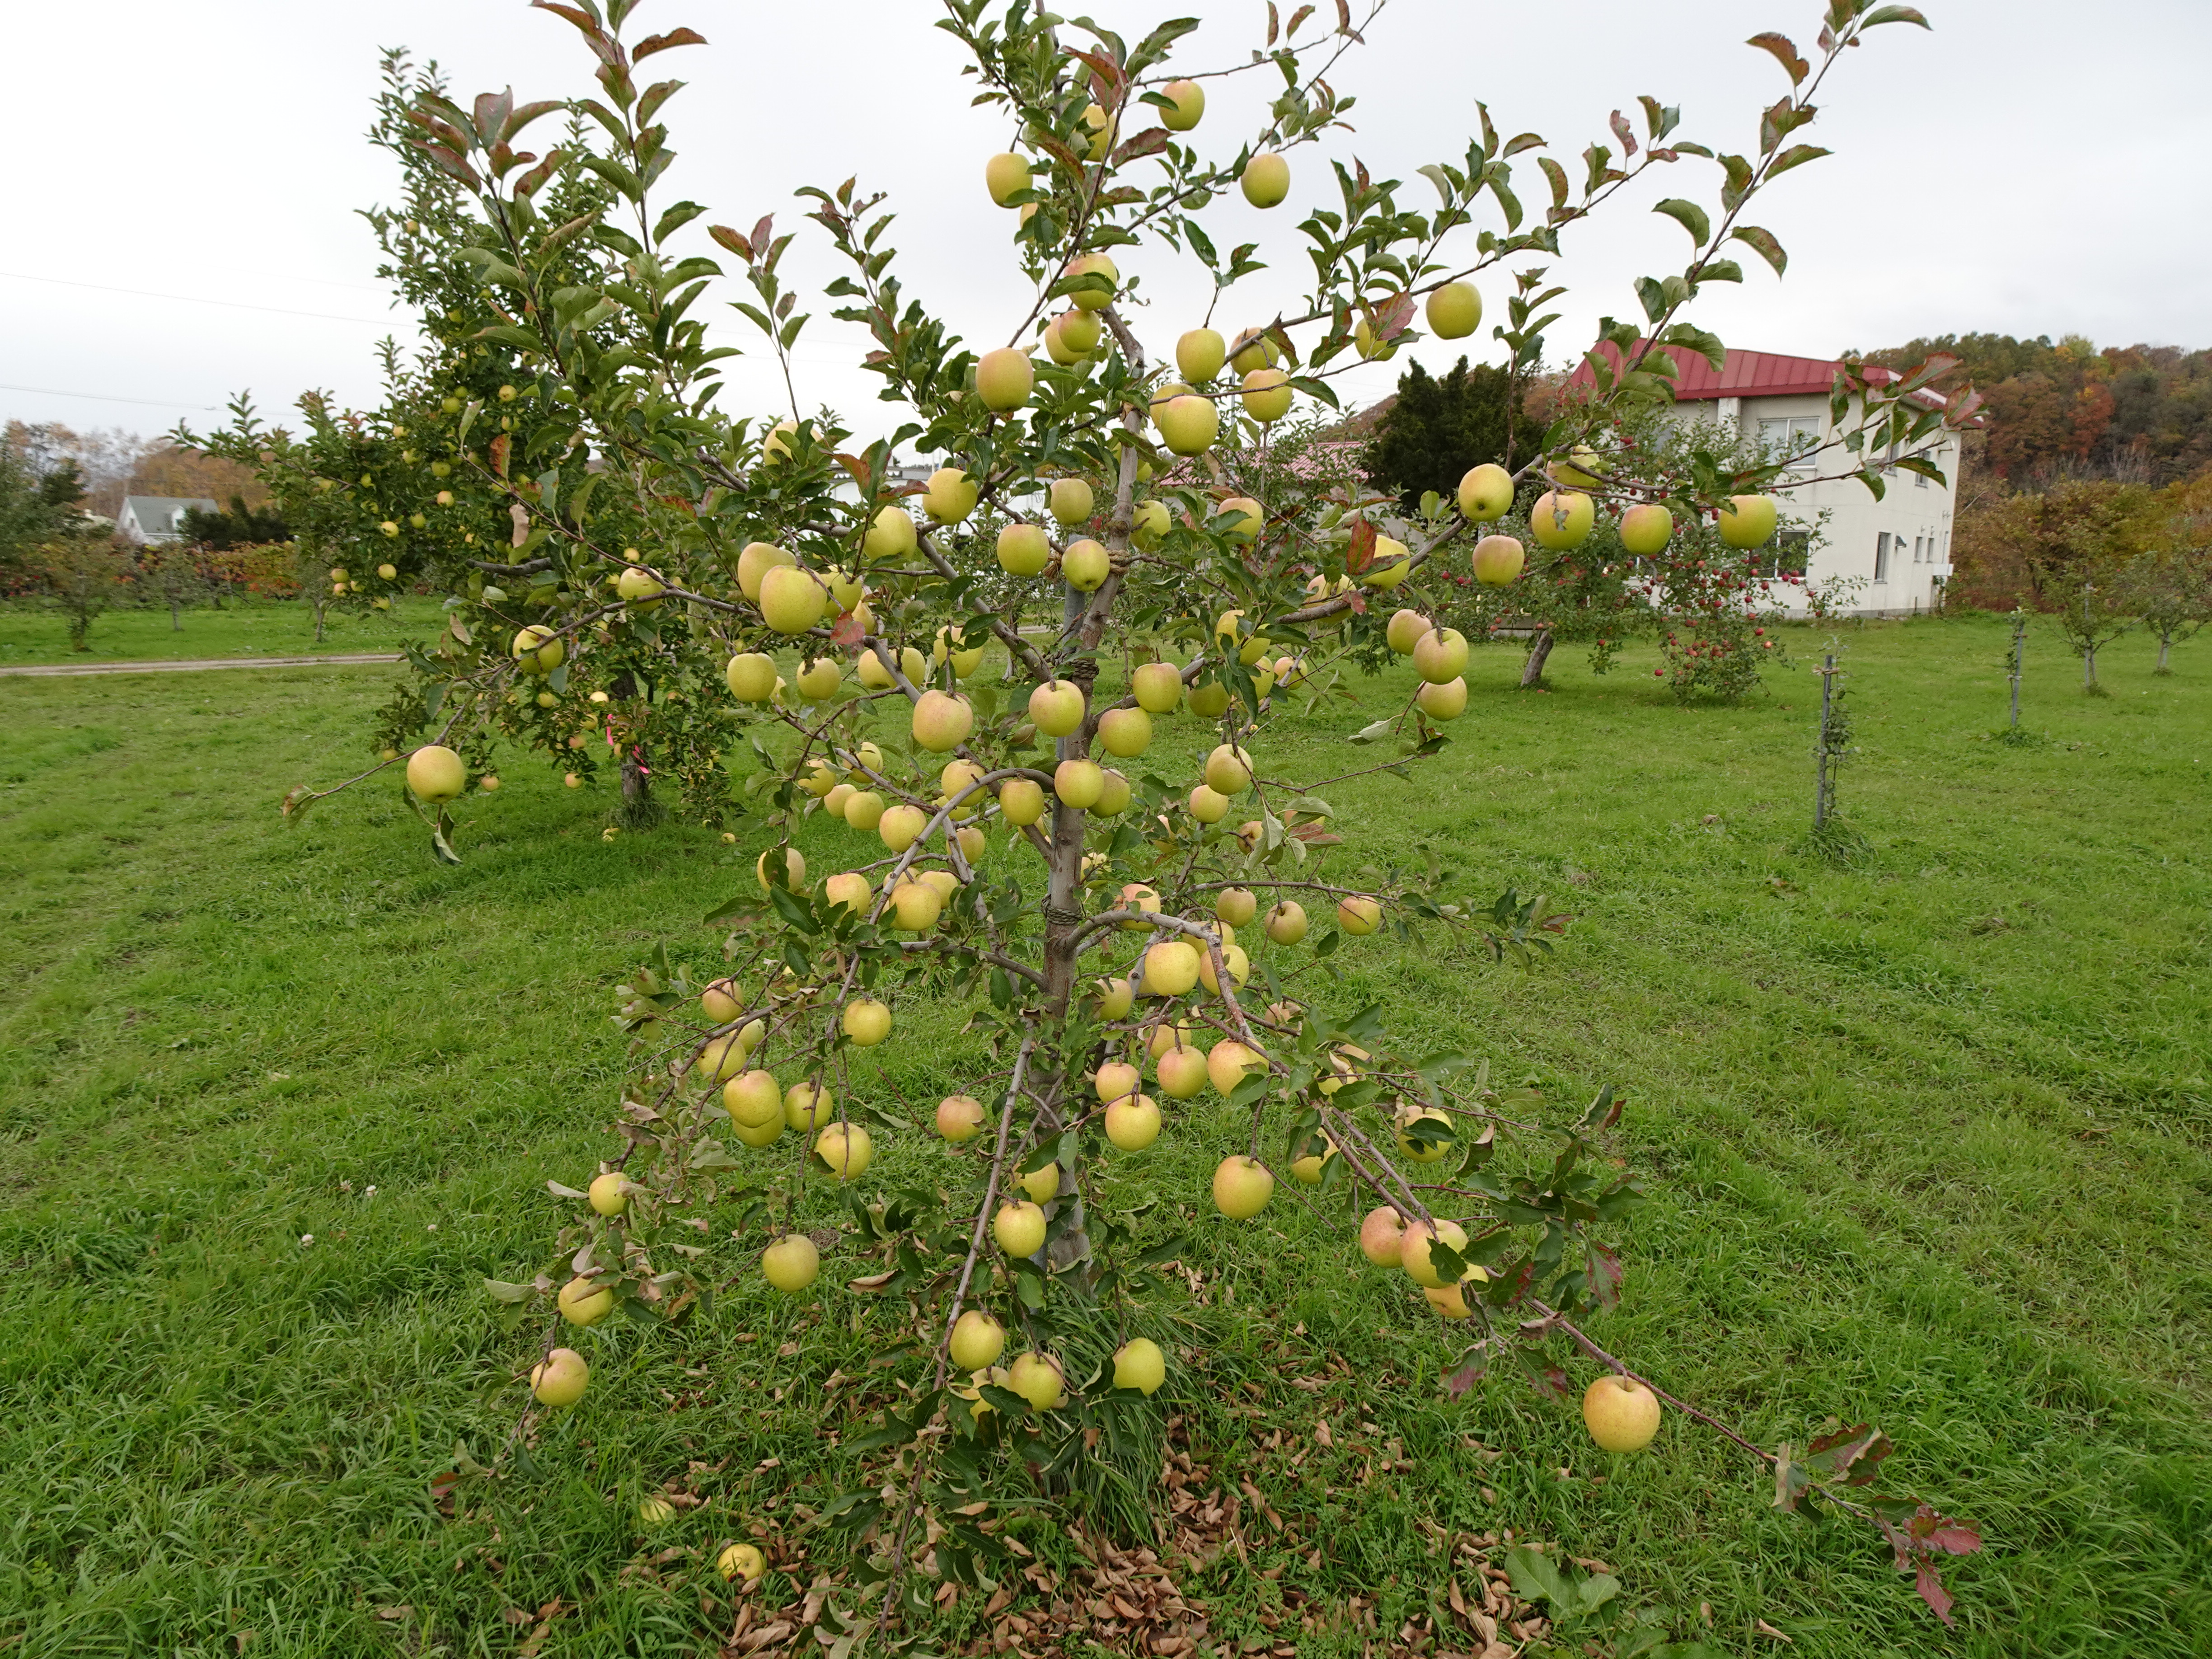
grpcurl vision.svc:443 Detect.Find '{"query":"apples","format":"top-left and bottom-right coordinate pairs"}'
top-left (1387, 609), bottom-right (1433, 656)
top-left (859, 588), bottom-right (870, 606)
top-left (883, 867), bottom-right (922, 891)
top-left (824, 784), bottom-right (858, 818)
top-left (1620, 504), bottom-right (1673, 555)
top-left (859, 505), bottom-right (917, 562)
top-left (912, 689), bottom-right (973, 753)
top-left (1158, 79), bottom-right (1204, 131)
top-left (1207, 1036), bottom-right (1269, 1099)
top-left (820, 564), bottom-right (862, 619)
top-left (1217, 497), bottom-right (1263, 537)
top-left (757, 848), bottom-right (805, 895)
top-left (1058, 309), bottom-right (1102, 352)
top-left (1157, 1045), bottom-right (1208, 1099)
top-left (1112, 1337), bottom-right (1165, 1397)
top-left (1151, 814), bottom-right (1191, 855)
top-left (1237, 821), bottom-right (1264, 855)
top-left (1029, 680), bottom-right (1085, 737)
top-left (1423, 1258), bottom-right (1489, 1318)
top-left (1086, 769), bottom-right (1131, 818)
top-left (1531, 488), bottom-right (1595, 550)
top-left (1020, 198), bottom-right (1071, 248)
top-left (1413, 627), bottom-right (1469, 685)
top-left (1304, 573), bottom-right (1357, 623)
top-left (1214, 609), bottom-right (1271, 667)
top-left (1290, 1127), bottom-right (1339, 1184)
top-left (407, 746), bottom-right (466, 805)
top-left (946, 828), bottom-right (985, 864)
top-left (1241, 369), bottom-right (1293, 422)
top-left (1161, 395), bottom-right (1219, 457)
top-left (1359, 534), bottom-right (1411, 590)
top-left (814, 1122), bottom-right (871, 1181)
top-left (1045, 314), bottom-right (1091, 366)
top-left (1273, 656), bottom-right (1308, 690)
top-left (762, 1234), bottom-right (819, 1292)
top-left (1071, 104), bottom-right (1121, 162)
top-left (1229, 327), bottom-right (1280, 377)
top-left (1216, 887), bottom-right (1257, 928)
top-left (1132, 662), bottom-right (1182, 713)
top-left (558, 1276), bottom-right (613, 1326)
top-left (885, 647), bottom-right (926, 689)
top-left (1583, 1375), bottom-right (1661, 1453)
top-left (986, 153), bottom-right (1033, 208)
top-left (732, 1103), bottom-right (786, 1147)
top-left (696, 1036), bottom-right (746, 1082)
top-left (589, 1172), bottom-right (632, 1216)
top-left (1008, 1351), bottom-right (1063, 1412)
top-left (1137, 462), bottom-right (1153, 482)
top-left (759, 565), bottom-right (827, 634)
top-left (1126, 968), bottom-right (1156, 1005)
top-left (930, 800), bottom-right (937, 806)
top-left (1189, 784), bottom-right (1229, 824)
top-left (1187, 670), bottom-right (1231, 718)
top-left (796, 657), bottom-right (841, 700)
top-left (1181, 920), bottom-right (1235, 958)
top-left (1144, 942), bottom-right (1201, 996)
top-left (999, 779), bottom-right (1044, 826)
top-left (1360, 1205), bottom-right (1413, 1268)
top-left (1213, 1155), bottom-right (1274, 1220)
top-left (844, 791), bottom-right (885, 830)
top-left (997, 524), bottom-right (1050, 577)
top-left (843, 741), bottom-right (883, 783)
top-left (727, 653), bottom-right (777, 702)
top-left (1061, 539), bottom-right (1110, 592)
top-left (994, 1201), bottom-right (1046, 1258)
top-left (619, 566), bottom-right (666, 611)
top-left (889, 881), bottom-right (942, 930)
top-left (1063, 252), bottom-right (1117, 311)
top-left (851, 600), bottom-right (877, 635)
top-left (941, 759), bottom-right (987, 807)
top-left (937, 795), bottom-right (970, 821)
top-left (933, 625), bottom-right (983, 678)
top-left (737, 542), bottom-right (798, 602)
top-left (798, 758), bottom-right (836, 798)
top-left (1144, 1015), bottom-right (1191, 1061)
top-left (936, 1095), bottom-right (985, 1144)
top-left (1231, 693), bottom-right (1243, 703)
top-left (1240, 153), bottom-right (1290, 208)
top-left (857, 649), bottom-right (892, 690)
top-left (879, 805), bottom-right (927, 852)
top-left (918, 871), bottom-right (958, 909)
top-left (1395, 1105), bottom-right (1453, 1163)
top-left (513, 625), bottom-right (563, 674)
top-left (1249, 656), bottom-right (1274, 701)
top-left (1018, 812), bottom-right (1048, 842)
top-left (1718, 494), bottom-right (1778, 548)
top-left (769, 676), bottom-right (787, 705)
top-left (1129, 500), bottom-right (1171, 552)
top-left (922, 468), bottom-right (978, 525)
top-left (1095, 1062), bottom-right (1141, 1104)
top-left (1199, 945), bottom-right (1249, 997)
top-left (1265, 1001), bottom-right (1303, 1038)
top-left (1472, 534), bottom-right (1524, 587)
top-left (826, 873), bottom-right (871, 920)
top-left (1149, 383), bottom-right (1198, 433)
top-left (1049, 478), bottom-right (1093, 525)
top-left (1338, 895), bottom-right (1381, 935)
top-left (843, 998), bottom-right (891, 1047)
top-left (728, 1016), bottom-right (765, 1055)
top-left (1458, 463), bottom-right (1514, 521)
top-left (1081, 852), bottom-right (1112, 889)
top-left (1546, 445), bottom-right (1600, 491)
top-left (783, 963), bottom-right (819, 994)
top-left (1176, 328), bottom-right (1225, 383)
top-left (1105, 1094), bottom-right (1161, 1151)
top-left (1010, 1158), bottom-right (1059, 1207)
top-left (1205, 744), bottom-right (1253, 795)
top-left (784, 1082), bottom-right (832, 1133)
top-left (882, 900), bottom-right (908, 931)
top-left (1264, 901), bottom-right (1308, 946)
top-left (1354, 315), bottom-right (1399, 361)
top-left (961, 1367), bottom-right (1009, 1424)
top-left (1088, 977), bottom-right (1132, 1021)
top-left (1109, 429), bottom-right (1148, 472)
top-left (1400, 1218), bottom-right (1469, 1289)
top-left (1054, 759), bottom-right (1104, 808)
top-left (1314, 1067), bottom-right (1359, 1095)
top-left (949, 1310), bottom-right (1004, 1371)
top-left (1417, 675), bottom-right (1468, 721)
top-left (763, 421), bottom-right (823, 466)
top-left (1426, 281), bottom-right (1482, 339)
top-left (1114, 884), bottom-right (1161, 933)
top-left (722, 1070), bottom-right (781, 1128)
top-left (702, 978), bottom-right (744, 1023)
top-left (1098, 707), bottom-right (1152, 758)
top-left (1284, 811), bottom-right (1325, 827)
top-left (975, 347), bottom-right (1034, 412)
top-left (530, 1348), bottom-right (589, 1407)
